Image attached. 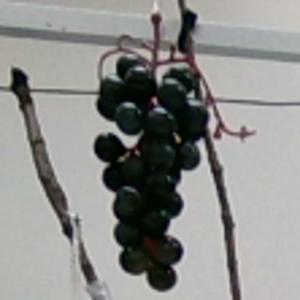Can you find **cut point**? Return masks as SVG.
<instances>
[{
	"label": "cut point",
	"instance_id": "6a23745f",
	"mask_svg": "<svg viewBox=\"0 0 300 300\" xmlns=\"http://www.w3.org/2000/svg\"><path fill=\"white\" fill-rule=\"evenodd\" d=\"M148 21L153 27L152 63L156 66L160 48V25L163 23V15L160 11V0H153V7H151L148 14Z\"/></svg>",
	"mask_w": 300,
	"mask_h": 300
}]
</instances>
